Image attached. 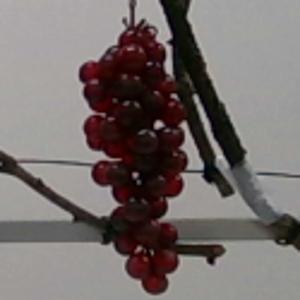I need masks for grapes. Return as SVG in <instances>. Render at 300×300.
Wrapping results in <instances>:
<instances>
[{
  "instance_id": "grapes-1",
  "label": "grapes",
  "mask_w": 300,
  "mask_h": 300,
  "mask_svg": "<svg viewBox=\"0 0 300 300\" xmlns=\"http://www.w3.org/2000/svg\"><path fill=\"white\" fill-rule=\"evenodd\" d=\"M167 50L154 35L136 28L123 31L98 61L81 64L78 77L92 115L83 125L89 149L117 161L98 160L95 185L111 188L118 204L108 217L116 234L113 247L127 257L128 277L141 280L152 296L166 292L167 275L177 271L175 225L159 222L168 198L181 194V173L189 164L182 147L187 119L184 102L172 98L174 80L165 69Z\"/></svg>"
}]
</instances>
